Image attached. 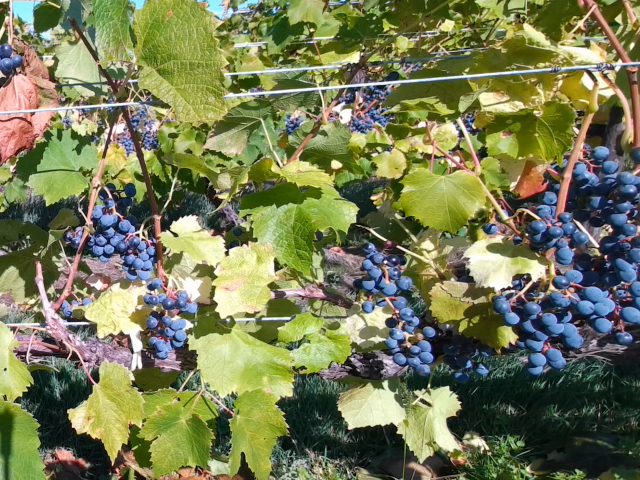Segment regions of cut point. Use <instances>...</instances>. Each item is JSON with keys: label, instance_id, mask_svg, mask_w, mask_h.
Returning a JSON list of instances; mask_svg holds the SVG:
<instances>
[{"label": "cut point", "instance_id": "1", "mask_svg": "<svg viewBox=\"0 0 640 480\" xmlns=\"http://www.w3.org/2000/svg\"><path fill=\"white\" fill-rule=\"evenodd\" d=\"M527 214L529 216L533 215V211L527 208H521V209H517L515 210L513 213H511L508 217L513 221L514 218H516L518 215L520 214Z\"/></svg>", "mask_w": 640, "mask_h": 480}, {"label": "cut point", "instance_id": "2", "mask_svg": "<svg viewBox=\"0 0 640 480\" xmlns=\"http://www.w3.org/2000/svg\"><path fill=\"white\" fill-rule=\"evenodd\" d=\"M155 218H156V217H155V216H153V215H148L147 217H145V218L142 220V222H141V224H140V228H141V229H144V228L146 227V224H147L149 221L154 220Z\"/></svg>", "mask_w": 640, "mask_h": 480}]
</instances>
